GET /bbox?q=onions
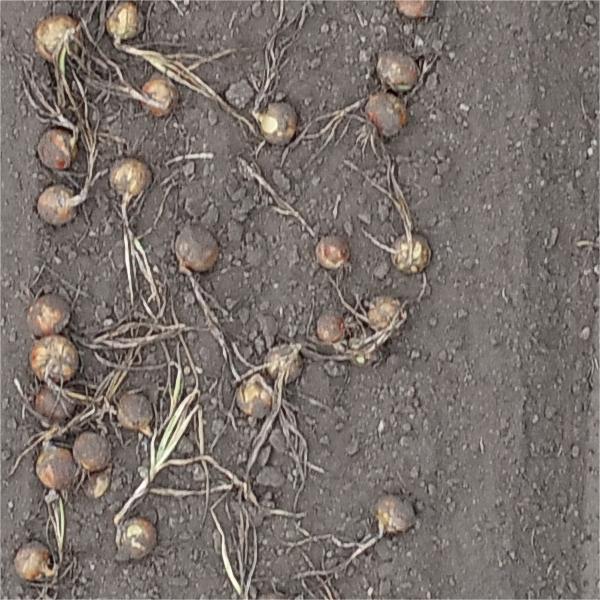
[114,393,153,432]
[34,16,80,61]
[31,383,75,419]
[363,92,405,135]
[105,4,141,38]
[36,129,74,169]
[313,309,345,342]
[113,516,155,559]
[174,225,218,272]
[12,541,52,580]
[364,294,399,329]
[376,49,417,89]
[35,447,78,488]
[106,159,151,197]
[266,343,301,382]
[71,431,110,471]
[35,185,77,225]
[233,377,273,415]
[30,336,78,379]
[315,235,348,268]
[27,295,67,335]
[390,235,430,272]
[137,76,172,114]
[372,494,411,534]
[256,101,297,141]
[395,0,433,19]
